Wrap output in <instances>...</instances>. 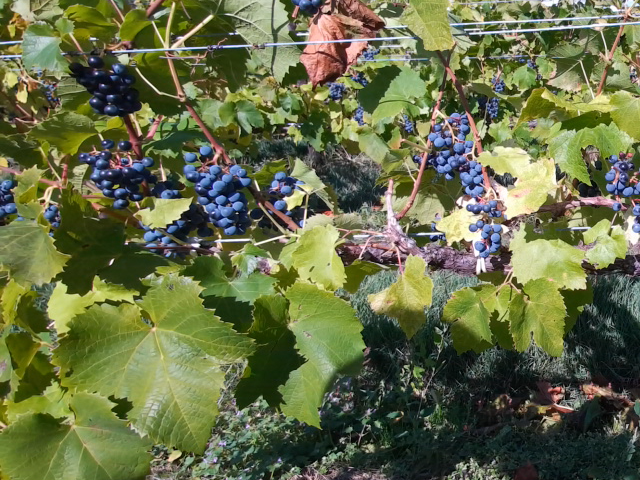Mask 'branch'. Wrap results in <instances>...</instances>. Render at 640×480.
Instances as JSON below:
<instances>
[{"instance_id":"branch-1","label":"branch","mask_w":640,"mask_h":480,"mask_svg":"<svg viewBox=\"0 0 640 480\" xmlns=\"http://www.w3.org/2000/svg\"><path fill=\"white\" fill-rule=\"evenodd\" d=\"M435 54L439 56L441 63L443 64V71H442V76H441V81H440V87H439V94L438 97L435 101V104L433 106V113H432V117H431V124L435 125L436 124V119L438 116V109L440 106V103L442 102L443 96H444V89H445V84H446V79H447V75L449 76L450 80L452 81V84L454 85V87L456 88L458 95L461 99L467 120L469 122V125L472 129V131L474 132V136H475V141H476V145H477V152L481 153L482 152V142H481V137H480V133L478 128L476 127L473 117L471 115L468 103H467V99L464 95V92L460 86V84L457 82V79L455 77V75L453 74L450 65H451V61H452V56H453V51L449 50L447 53V58L444 56V53L442 52L441 49H437L435 51Z\"/></svg>"},{"instance_id":"branch-2","label":"branch","mask_w":640,"mask_h":480,"mask_svg":"<svg viewBox=\"0 0 640 480\" xmlns=\"http://www.w3.org/2000/svg\"><path fill=\"white\" fill-rule=\"evenodd\" d=\"M165 56H166L167 62L169 63V67L171 69V74H172V77H173V81L175 82V85H176V88L178 90L179 96L181 97L186 110L192 116L193 120L197 123L198 127L204 133V135L208 138V140L211 141V145L213 146V148L216 151V153L222 156V158L225 160V162L227 163L228 166H231L232 165V160L227 155L225 149L217 141V139L212 136V134L209 131L208 127L202 122V120L200 119L199 115L195 111V108L192 105V103L188 101V98L185 95V93L183 91V88L181 86L180 80L178 78L176 67H175L174 61H173V59L171 57V53L170 52H165Z\"/></svg>"},{"instance_id":"branch-3","label":"branch","mask_w":640,"mask_h":480,"mask_svg":"<svg viewBox=\"0 0 640 480\" xmlns=\"http://www.w3.org/2000/svg\"><path fill=\"white\" fill-rule=\"evenodd\" d=\"M431 145H432L431 141H428L426 143V145H425L424 152H423V155H422V162L420 163V168H419V171H418L417 176H416V181H415V184L413 186V190H412V192H411V194L409 196V199H408L406 205L404 206L403 210L398 215L395 216V220L396 221H400L407 214V212L409 211L410 207L412 206V204L414 202V199H415L416 194L418 192L419 186L421 184V179H422L423 173L425 171L426 161H427V158H428V154H429Z\"/></svg>"},{"instance_id":"branch-4","label":"branch","mask_w":640,"mask_h":480,"mask_svg":"<svg viewBox=\"0 0 640 480\" xmlns=\"http://www.w3.org/2000/svg\"><path fill=\"white\" fill-rule=\"evenodd\" d=\"M248 190L252 193V195L259 201L261 202L268 210H270L271 212H273L274 214H276L282 221H284L286 224H288L289 227H291L294 230H298L299 229V225L294 222L289 216L282 214L277 208L273 207L266 199H264L257 191L256 189L252 186L249 185L248 186Z\"/></svg>"},{"instance_id":"branch-5","label":"branch","mask_w":640,"mask_h":480,"mask_svg":"<svg viewBox=\"0 0 640 480\" xmlns=\"http://www.w3.org/2000/svg\"><path fill=\"white\" fill-rule=\"evenodd\" d=\"M123 124H124L125 130L127 131L129 141L135 149L136 158L141 159L143 157V148H142V145L140 144L135 127L133 126V123L129 118L128 114H125L123 116Z\"/></svg>"},{"instance_id":"branch-6","label":"branch","mask_w":640,"mask_h":480,"mask_svg":"<svg viewBox=\"0 0 640 480\" xmlns=\"http://www.w3.org/2000/svg\"><path fill=\"white\" fill-rule=\"evenodd\" d=\"M92 206H93V209L96 212L106 214V215H108L110 217H113V218H116V219H119V220H123V221L129 223L130 225H132L135 228H139L140 227V224L137 221H135L134 219L130 218L129 216H127V215H125V214H123L121 212L113 211V210H111L109 208H106L104 205L99 204L97 202H93Z\"/></svg>"},{"instance_id":"branch-7","label":"branch","mask_w":640,"mask_h":480,"mask_svg":"<svg viewBox=\"0 0 640 480\" xmlns=\"http://www.w3.org/2000/svg\"><path fill=\"white\" fill-rule=\"evenodd\" d=\"M176 10H177V3L173 2L170 15L168 18L167 26H166V31H165L164 47L170 46L169 41H170L171 28H172L173 20L175 18Z\"/></svg>"},{"instance_id":"branch-8","label":"branch","mask_w":640,"mask_h":480,"mask_svg":"<svg viewBox=\"0 0 640 480\" xmlns=\"http://www.w3.org/2000/svg\"><path fill=\"white\" fill-rule=\"evenodd\" d=\"M609 69H610V65L609 64H606L604 66V68H603L602 77H601V79H600V81H599V83L597 85V88H596V94L597 95L601 94V90H602V88H603V86H604V84L606 82L607 74H608Z\"/></svg>"},{"instance_id":"branch-9","label":"branch","mask_w":640,"mask_h":480,"mask_svg":"<svg viewBox=\"0 0 640 480\" xmlns=\"http://www.w3.org/2000/svg\"><path fill=\"white\" fill-rule=\"evenodd\" d=\"M623 32H624V28H619L618 29L617 34H616L615 39H614V43H613V45H612V47L610 49V52H609V57L610 58L614 57V54H615V52H616V50L618 48V45H619V42H620V39H621V36H622Z\"/></svg>"},{"instance_id":"branch-10","label":"branch","mask_w":640,"mask_h":480,"mask_svg":"<svg viewBox=\"0 0 640 480\" xmlns=\"http://www.w3.org/2000/svg\"><path fill=\"white\" fill-rule=\"evenodd\" d=\"M38 182L39 183H44V184H47V185H50V186H53V187H58V188H63L64 187L63 183H61L59 181L52 180V179L39 178Z\"/></svg>"},{"instance_id":"branch-11","label":"branch","mask_w":640,"mask_h":480,"mask_svg":"<svg viewBox=\"0 0 640 480\" xmlns=\"http://www.w3.org/2000/svg\"><path fill=\"white\" fill-rule=\"evenodd\" d=\"M640 3V0H633V2L629 5V7L627 8V10L624 12L623 16L624 19L622 20L623 22H626L630 13L634 10V8L636 7L637 4Z\"/></svg>"},{"instance_id":"branch-12","label":"branch","mask_w":640,"mask_h":480,"mask_svg":"<svg viewBox=\"0 0 640 480\" xmlns=\"http://www.w3.org/2000/svg\"><path fill=\"white\" fill-rule=\"evenodd\" d=\"M166 0H156L152 6L147 10L146 12V17L150 18L152 13L159 7V5H161L162 3H165Z\"/></svg>"},{"instance_id":"branch-13","label":"branch","mask_w":640,"mask_h":480,"mask_svg":"<svg viewBox=\"0 0 640 480\" xmlns=\"http://www.w3.org/2000/svg\"><path fill=\"white\" fill-rule=\"evenodd\" d=\"M0 170L5 172V173H7V174H14V175H17V176H22L23 175L22 171H19V170H16V169H10V168H8L6 166H3V165H0Z\"/></svg>"}]
</instances>
